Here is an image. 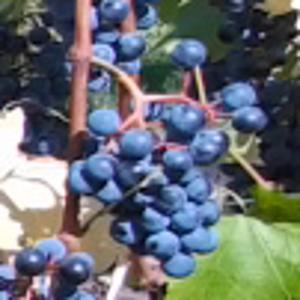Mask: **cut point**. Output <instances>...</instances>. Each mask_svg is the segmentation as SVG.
Masks as SVG:
<instances>
[{
  "label": "cut point",
  "instance_id": "1",
  "mask_svg": "<svg viewBox=\"0 0 300 300\" xmlns=\"http://www.w3.org/2000/svg\"><path fill=\"white\" fill-rule=\"evenodd\" d=\"M87 60L90 64L98 65L104 70H106L112 77L122 83L124 86L128 88V90L134 94L139 100L144 98L143 92L140 88L133 82L131 77L120 67L115 64L110 63L103 57L97 55H89Z\"/></svg>",
  "mask_w": 300,
  "mask_h": 300
}]
</instances>
